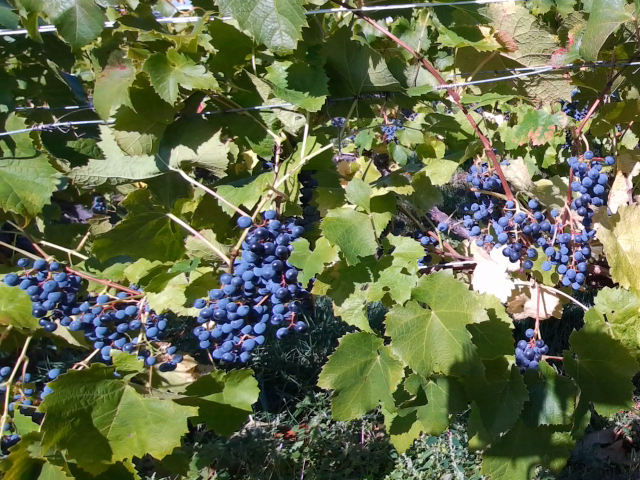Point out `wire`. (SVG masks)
Masks as SVG:
<instances>
[{
  "mask_svg": "<svg viewBox=\"0 0 640 480\" xmlns=\"http://www.w3.org/2000/svg\"><path fill=\"white\" fill-rule=\"evenodd\" d=\"M554 69L553 65L550 64H540V65H530L526 67L513 66L506 68H490V69H479L478 74H493V73H509V72H522L515 75H501L496 78H484L473 80L472 82H452L446 85H434V90H448L455 87H477L483 86L489 83H498L503 80H518L528 76H538Z\"/></svg>",
  "mask_w": 640,
  "mask_h": 480,
  "instance_id": "wire-1",
  "label": "wire"
},
{
  "mask_svg": "<svg viewBox=\"0 0 640 480\" xmlns=\"http://www.w3.org/2000/svg\"><path fill=\"white\" fill-rule=\"evenodd\" d=\"M504 0H460V1H426L419 3H408V4H391L385 6H375V7H359V8H351V9H314V10H305V15H317V14H353V13H361V12H385L391 11L394 9H409V8H421L428 6H463V5H480L489 3L490 5L496 3H503Z\"/></svg>",
  "mask_w": 640,
  "mask_h": 480,
  "instance_id": "wire-2",
  "label": "wire"
},
{
  "mask_svg": "<svg viewBox=\"0 0 640 480\" xmlns=\"http://www.w3.org/2000/svg\"><path fill=\"white\" fill-rule=\"evenodd\" d=\"M109 123L114 124L115 119L106 118V119H100V120H81V121H74V122L47 123V124L30 127V128L2 131L0 132V137L43 131L49 128L77 127V126H84V125H103V124H109Z\"/></svg>",
  "mask_w": 640,
  "mask_h": 480,
  "instance_id": "wire-3",
  "label": "wire"
},
{
  "mask_svg": "<svg viewBox=\"0 0 640 480\" xmlns=\"http://www.w3.org/2000/svg\"><path fill=\"white\" fill-rule=\"evenodd\" d=\"M292 106H293L292 102L266 103V104H260V105H251V106L235 107V108H228V109H219V110H214V111H204L203 115L204 116H216V115L230 114V113H237V112L262 110V109H268V108L292 107Z\"/></svg>",
  "mask_w": 640,
  "mask_h": 480,
  "instance_id": "wire-4",
  "label": "wire"
},
{
  "mask_svg": "<svg viewBox=\"0 0 640 480\" xmlns=\"http://www.w3.org/2000/svg\"><path fill=\"white\" fill-rule=\"evenodd\" d=\"M475 261H454L453 263H445V264H437V265H420V270H439V269H447V268H460L467 266H475Z\"/></svg>",
  "mask_w": 640,
  "mask_h": 480,
  "instance_id": "wire-5",
  "label": "wire"
},
{
  "mask_svg": "<svg viewBox=\"0 0 640 480\" xmlns=\"http://www.w3.org/2000/svg\"><path fill=\"white\" fill-rule=\"evenodd\" d=\"M596 63H597L596 64L597 68H610V67H616V66H625V67H639L640 66V61H637V62L614 61V62L604 63V61L602 59H597Z\"/></svg>",
  "mask_w": 640,
  "mask_h": 480,
  "instance_id": "wire-6",
  "label": "wire"
}]
</instances>
